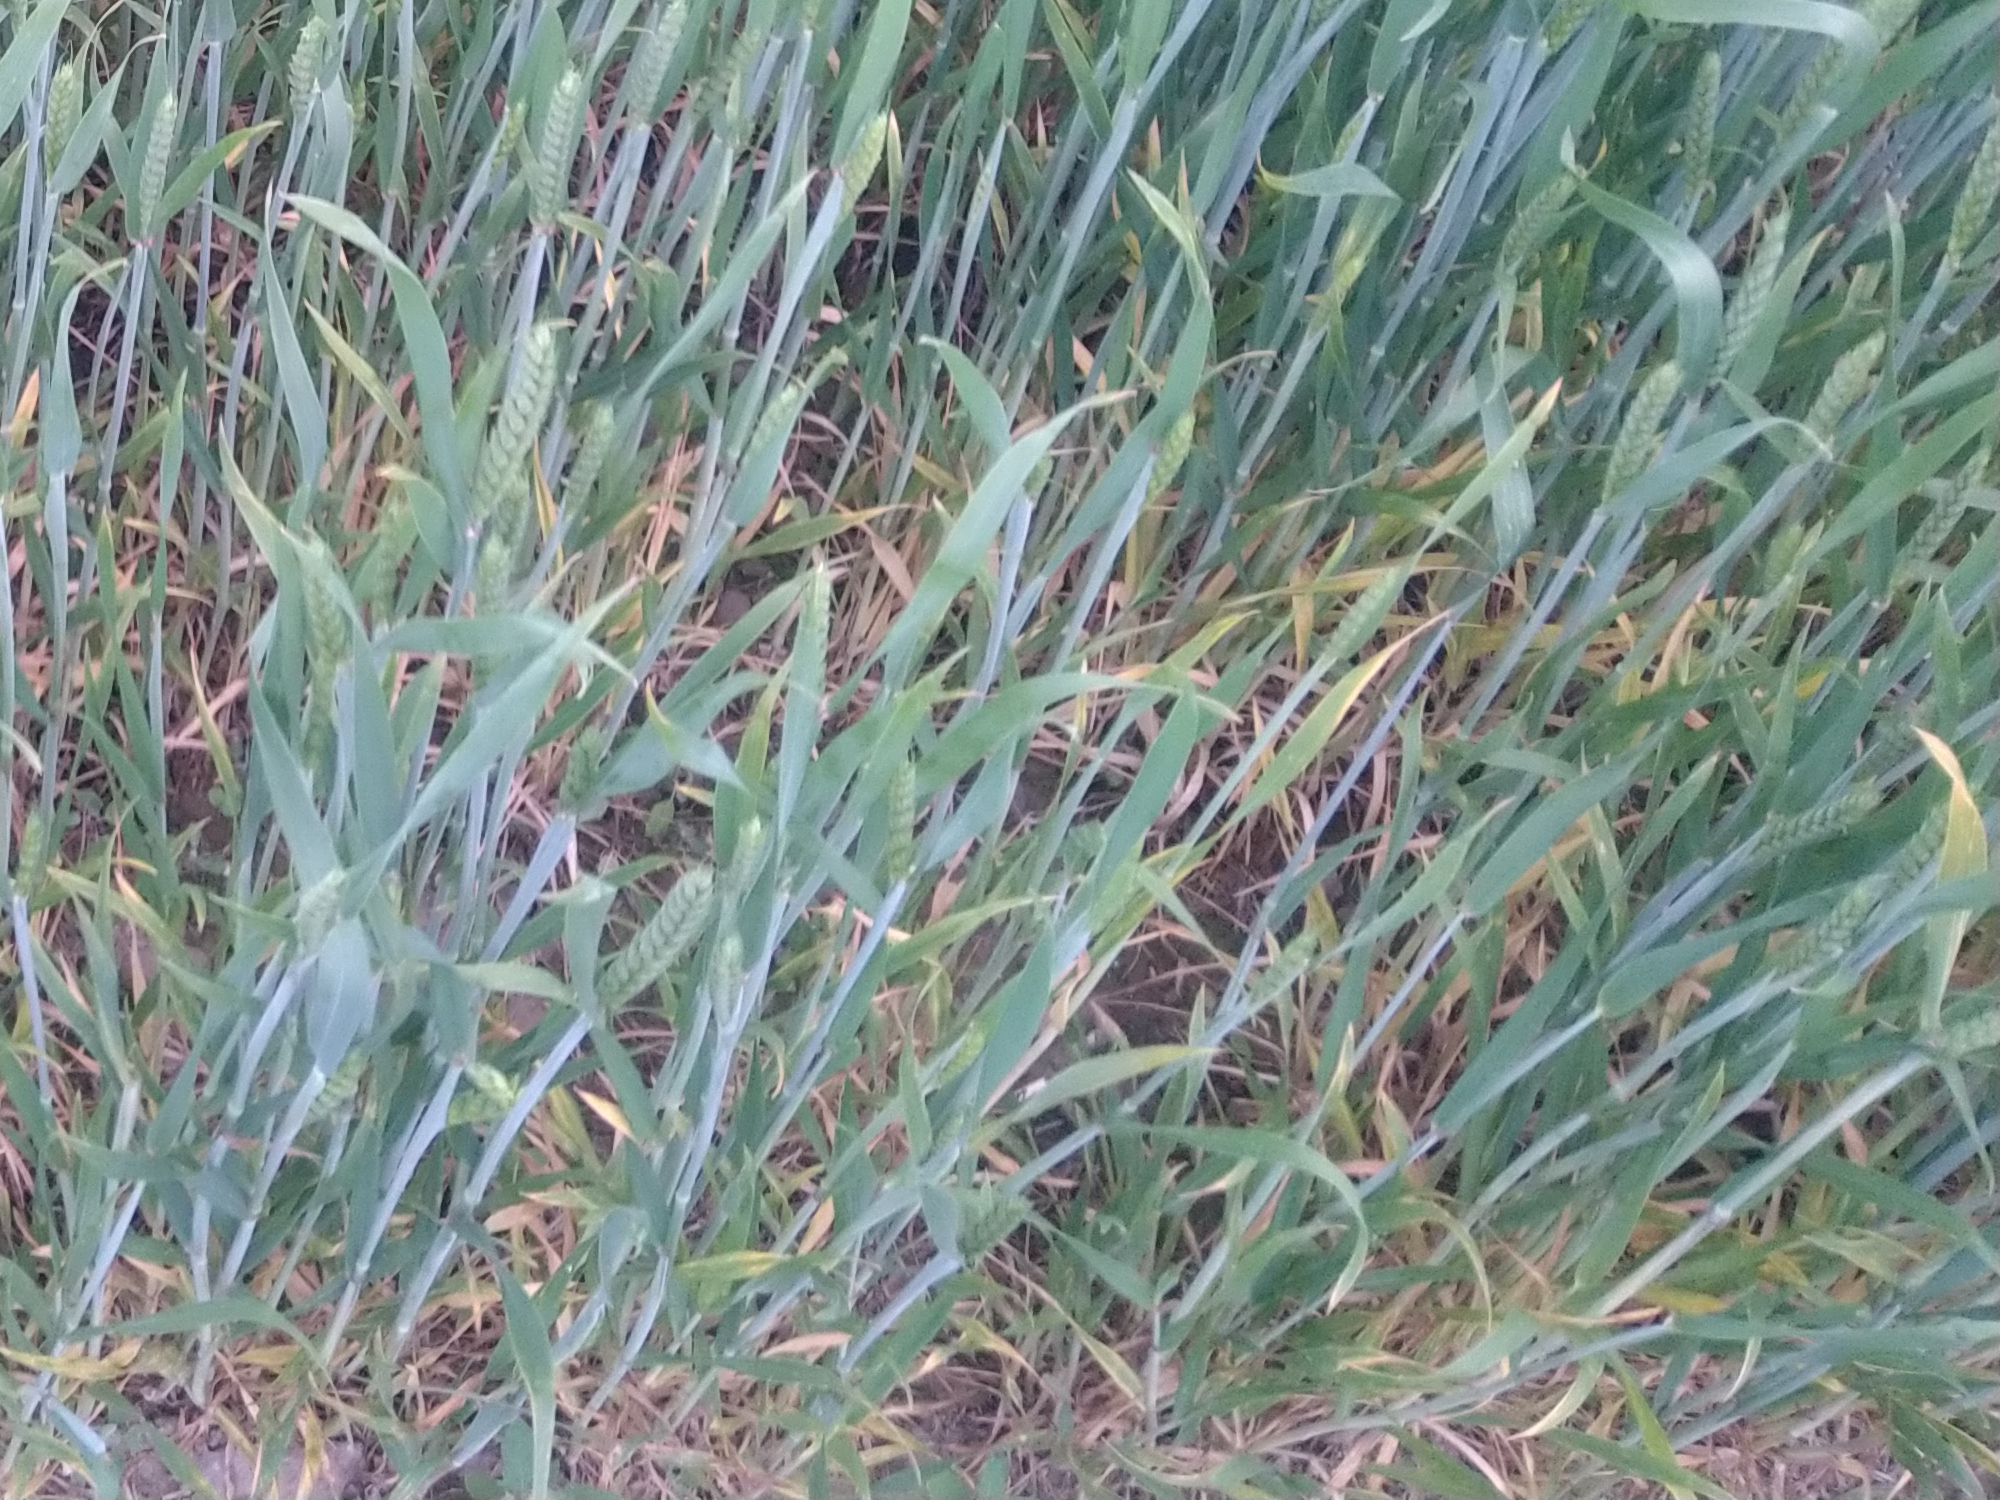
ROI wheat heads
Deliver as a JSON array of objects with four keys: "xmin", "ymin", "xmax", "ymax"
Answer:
[
  {"xmin": 1605, "ymin": 363, "xmax": 1682, "ymax": 500},
  {"xmin": 889, "ymin": 760, "xmax": 916, "ymax": 877},
  {"xmin": 531, "ymin": 73, "xmax": 581, "ymax": 223},
  {"xmin": 597, "ymin": 871, "xmax": 716, "ymax": 1004},
  {"xmin": 1757, "ymin": 780, "xmax": 1882, "ymax": 854},
  {"xmin": 371, "ymin": 505, "xmax": 403, "ymax": 627},
  {"xmin": 1887, "ymin": 804, "xmax": 1952, "ymax": 892},
  {"xmin": 814, "ymin": 565, "xmax": 831, "ymax": 651},
  {"xmin": 311, "ymin": 544, "xmax": 348, "ymax": 651},
  {"xmin": 1503, "ymin": 175, "xmax": 1576, "ymax": 264},
  {"xmin": 493, "ymin": 103, "xmax": 527, "ymax": 166},
  {"xmin": 16, "ymin": 813, "xmax": 44, "ymax": 894},
  {"xmin": 46, "ymin": 65, "xmax": 75, "ymax": 172},
  {"xmin": 1778, "ymin": 42, "xmax": 1847, "ymax": 137},
  {"xmin": 1311, "ymin": 258, "xmax": 1365, "ymax": 330},
  {"xmin": 472, "ymin": 477, "xmax": 534, "ymax": 551},
  {"xmin": 301, "ymin": 643, "xmax": 332, "ymax": 782},
  {"xmin": 961, "ymin": 1195, "xmax": 1032, "ymax": 1257},
  {"xmin": 1895, "ymin": 451, "xmax": 1992, "ymax": 583},
  {"xmin": 458, "ymin": 1064, "xmax": 518, "ymax": 1122},
  {"xmin": 1764, "ymin": 524, "xmax": 1802, "ymax": 591},
  {"xmin": 732, "ymin": 820, "xmax": 762, "ymax": 894},
  {"xmin": 307, "ymin": 1052, "xmax": 367, "ymax": 1120},
  {"xmin": 1332, "ymin": 110, "xmax": 1365, "ymax": 164},
  {"xmin": 746, "ymin": 386, "xmax": 804, "ymax": 459},
  {"xmin": 1948, "ymin": 118, "xmax": 2000, "ymax": 258},
  {"xmin": 476, "ymin": 540, "xmax": 511, "ymax": 681},
  {"xmin": 470, "ymin": 329, "xmax": 558, "ymax": 517},
  {"xmin": 1924, "ymin": 1010, "xmax": 2000, "ymax": 1056},
  {"xmin": 1323, "ymin": 573, "xmax": 1399, "ymax": 658},
  {"xmin": 1026, "ymin": 454, "xmax": 1051, "ymax": 496},
  {"xmin": 840, "ymin": 117, "xmax": 887, "ymax": 212},
  {"xmin": 627, "ymin": 0, "xmax": 689, "ymax": 121},
  {"xmin": 1801, "ymin": 332, "xmax": 1884, "ymax": 454},
  {"xmin": 1781, "ymin": 883, "xmax": 1878, "ymax": 971},
  {"xmin": 566, "ymin": 404, "xmax": 614, "ymax": 516},
  {"xmin": 1251, "ymin": 933, "xmax": 1319, "ymax": 1005},
  {"xmin": 1545, "ymin": 0, "xmax": 1645, "ymax": 50},
  {"xmin": 140, "ymin": 94, "xmax": 177, "ymax": 231},
  {"xmin": 1861, "ymin": 0, "xmax": 1929, "ymax": 47},
  {"xmin": 937, "ymin": 1030, "xmax": 985, "ymax": 1085},
  {"xmin": 1701, "ymin": 216, "xmax": 1789, "ymax": 389},
  {"xmin": 715, "ymin": 938, "xmax": 744, "ymax": 1012},
  {"xmin": 1146, "ymin": 413, "xmax": 1195, "ymax": 501},
  {"xmin": 1684, "ymin": 51, "xmax": 1722, "ymax": 195},
  {"xmin": 296, "ymin": 874, "xmax": 346, "ymax": 953},
  {"xmin": 291, "ymin": 18, "xmax": 324, "ymax": 111},
  {"xmin": 694, "ymin": 29, "xmax": 761, "ymax": 114}
]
